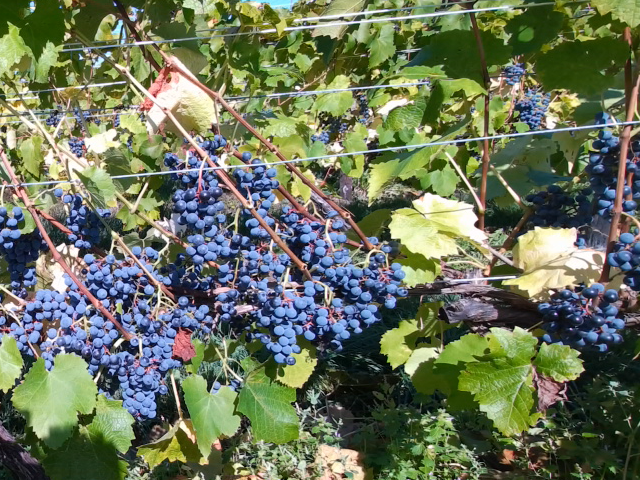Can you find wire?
I'll use <instances>...</instances> for the list:
<instances>
[{
  "instance_id": "1",
  "label": "wire",
  "mask_w": 640,
  "mask_h": 480,
  "mask_svg": "<svg viewBox=\"0 0 640 480\" xmlns=\"http://www.w3.org/2000/svg\"><path fill=\"white\" fill-rule=\"evenodd\" d=\"M639 124H640V121H621V122H611V123H605V124H595V125L588 124V125H580V126H574V127H565L561 129H541V130H534V131L505 132L499 135L472 136L469 138H456L452 140H436L429 143H413V144H403V145H394V146H386V147H376L373 149L357 150L354 152L331 154L327 156L295 158L293 160H268V161H258L255 163H245V164H225V165H219V166H205L204 170L205 171H221V170H228V169L258 168L260 166H270V165H296L298 163L330 161L334 159L356 157L359 155L375 154L378 152H388V151L416 149V148H431V147H436L438 145H455L458 143H471L474 141L501 140L508 137L536 136V135H544V134H563L568 132L597 129L598 127H607L612 125H639Z\"/></svg>"
},
{
  "instance_id": "2",
  "label": "wire",
  "mask_w": 640,
  "mask_h": 480,
  "mask_svg": "<svg viewBox=\"0 0 640 480\" xmlns=\"http://www.w3.org/2000/svg\"><path fill=\"white\" fill-rule=\"evenodd\" d=\"M553 5H554L553 1H549V2L540 1L536 3L503 4V5H497V6L482 7V8L448 10V11H440L435 13H423V14H409L407 16H389V17L360 19L359 21H355V22H330L326 24H304L301 26H290V27L285 26L284 30L286 32H292V31H303L306 29H328L332 27H336V28L357 27V26H362L363 24H371V23H381V22H391V21H410L412 19H427V18H437V17L450 16V15L484 13V12L500 11L505 9L538 8L543 6L552 7Z\"/></svg>"
},
{
  "instance_id": "3",
  "label": "wire",
  "mask_w": 640,
  "mask_h": 480,
  "mask_svg": "<svg viewBox=\"0 0 640 480\" xmlns=\"http://www.w3.org/2000/svg\"><path fill=\"white\" fill-rule=\"evenodd\" d=\"M275 32H276L275 28H267L263 30L235 31V32H229V33H219L214 35L182 36L179 38L144 40V41H138L134 43H119V44L109 45V46L69 47V48H63L62 52L71 53V52L111 51V50H117L121 48H136V47H141L146 45L181 43L184 41H205V40H217L222 38L238 37V36L266 35V34L275 33Z\"/></svg>"
},
{
  "instance_id": "4",
  "label": "wire",
  "mask_w": 640,
  "mask_h": 480,
  "mask_svg": "<svg viewBox=\"0 0 640 480\" xmlns=\"http://www.w3.org/2000/svg\"><path fill=\"white\" fill-rule=\"evenodd\" d=\"M475 0H452L447 2H434L427 4H417L412 6H401L399 8H383L376 10H361V11H353V12H339L336 14L323 15V16H312L306 18H293V23H308L314 21H325L338 19L341 17H355V16H363V15H378V14H386V13H401L403 11H414L419 9H429L436 7H449L454 5H462L467 3H474Z\"/></svg>"
},
{
  "instance_id": "5",
  "label": "wire",
  "mask_w": 640,
  "mask_h": 480,
  "mask_svg": "<svg viewBox=\"0 0 640 480\" xmlns=\"http://www.w3.org/2000/svg\"><path fill=\"white\" fill-rule=\"evenodd\" d=\"M199 171H200L199 167L179 168V169L160 171V172L144 171V172H131L128 174H112L111 178L112 179H130L134 177H147V176L163 177V176H170V175H176V174H182V173H196Z\"/></svg>"
},
{
  "instance_id": "6",
  "label": "wire",
  "mask_w": 640,
  "mask_h": 480,
  "mask_svg": "<svg viewBox=\"0 0 640 480\" xmlns=\"http://www.w3.org/2000/svg\"><path fill=\"white\" fill-rule=\"evenodd\" d=\"M518 274L511 275H495V276H472V277H452L436 279V284L454 283V282H475V281H498L518 279Z\"/></svg>"
},
{
  "instance_id": "7",
  "label": "wire",
  "mask_w": 640,
  "mask_h": 480,
  "mask_svg": "<svg viewBox=\"0 0 640 480\" xmlns=\"http://www.w3.org/2000/svg\"><path fill=\"white\" fill-rule=\"evenodd\" d=\"M82 182L81 178L77 179H62V180H43V181H32L29 183H6V188H31L34 186H52V185H68V184H80Z\"/></svg>"
},
{
  "instance_id": "8",
  "label": "wire",
  "mask_w": 640,
  "mask_h": 480,
  "mask_svg": "<svg viewBox=\"0 0 640 480\" xmlns=\"http://www.w3.org/2000/svg\"><path fill=\"white\" fill-rule=\"evenodd\" d=\"M241 24H234L229 26H219V27H206V28H195V33H208V32H221V31H232L236 29H241Z\"/></svg>"
}]
</instances>
